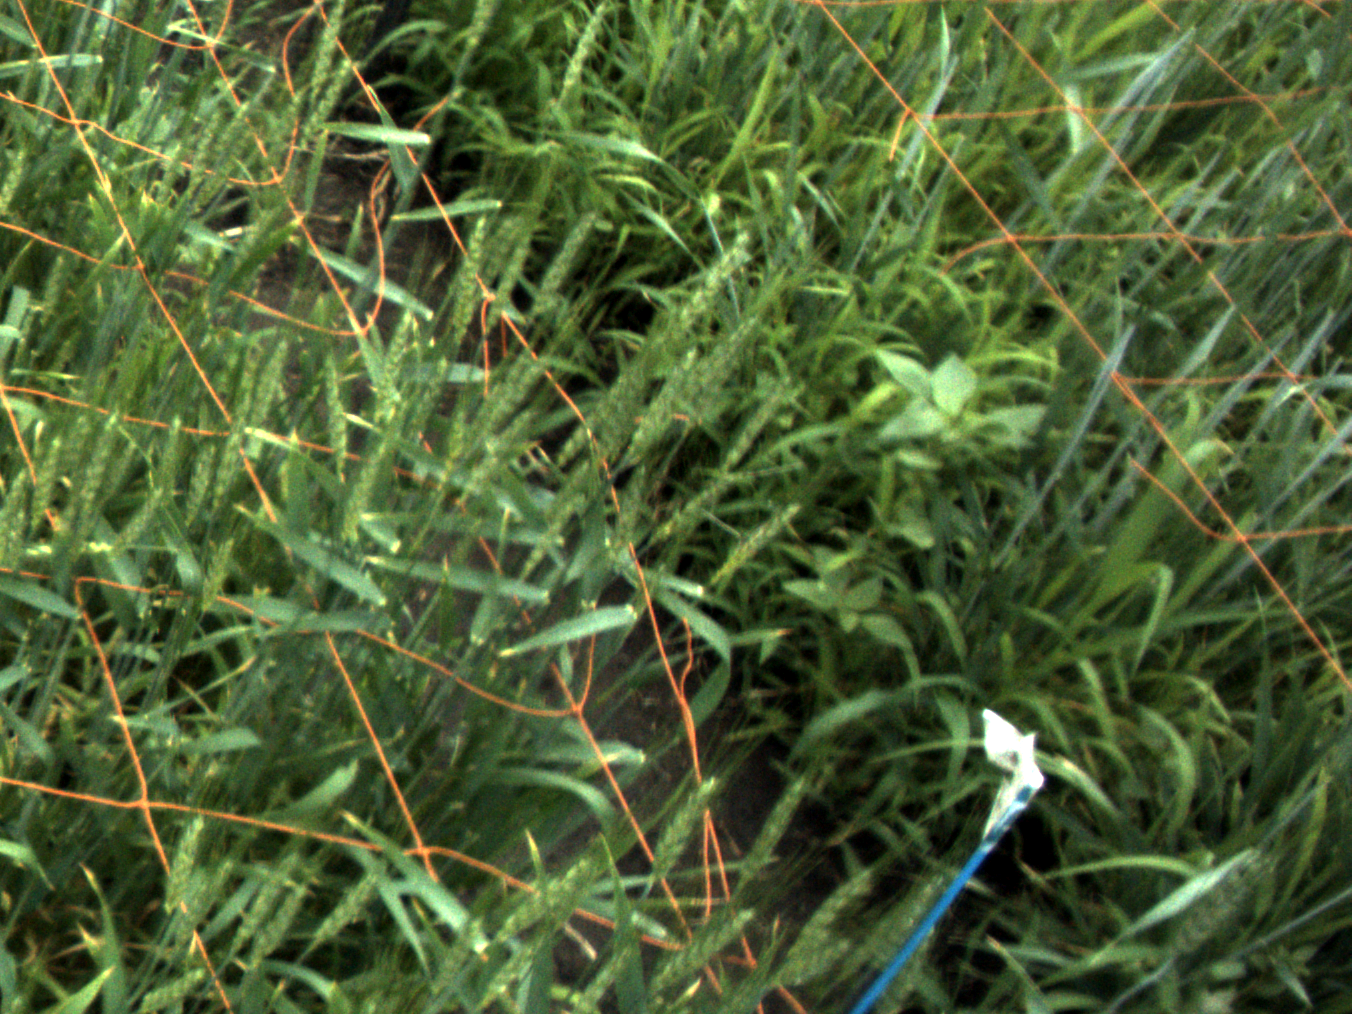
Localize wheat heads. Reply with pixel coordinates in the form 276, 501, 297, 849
610, 467, 649, 557
108, 114, 145, 166
601, 367, 644, 460
559, 365, 626, 457
735, 774, 807, 883
0, 469, 27, 559
645, 772, 718, 886
162, 814, 205, 909
309, 874, 381, 948
548, 459, 588, 525
723, 373, 793, 467
624, 370, 688, 463
429, 916, 483, 997
298, 56, 352, 152
186, 440, 215, 520
653, 478, 728, 538
670, 227, 755, 329
110, 486, 163, 560
189, 124, 221, 182
64, 413, 90, 475
83, 413, 121, 502
210, 0, 233, 41
322, 351, 348, 468
474, 244, 508, 294
531, 213, 594, 316
562, 2, 608, 92
344, 413, 404, 548
774, 939, 855, 990
346, 983, 379, 1014
872, 921, 934, 1014
484, 362, 544, 435
31, 435, 62, 526
231, 230, 260, 273
215, 98, 250, 160
874, 875, 942, 965
440, 408, 474, 478
411, 356, 445, 434
101, 440, 137, 506
310, 0, 350, 99
1160, 26, 1196, 82
157, 143, 182, 205
200, 537, 239, 613
480, 934, 550, 1003
677, 317, 760, 407
523, 494, 586, 575
452, 220, 490, 341
0, 145, 29, 225
36, 257, 64, 327
140, 969, 204, 1014
1163, 847, 1270, 961
466, 357, 520, 436
156, 414, 184, 500
7, 509, 28, 567
462, 412, 530, 501
255, 337, 292, 425
691, 466, 751, 484
466, 0, 513, 50
786, 866, 872, 961
250, 885, 307, 961
210, 418, 243, 517
493, 859, 588, 946
264, 85, 307, 140
841, 913, 893, 978
233, 880, 284, 946
682, 358, 744, 430
711, 502, 800, 584
560, 948, 631, 1014
448, 216, 518, 289
196, 125, 254, 207
374, 309, 412, 417
102, 0, 172, 71
486, 255, 531, 333
174, 860, 231, 950
641, 907, 754, 997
